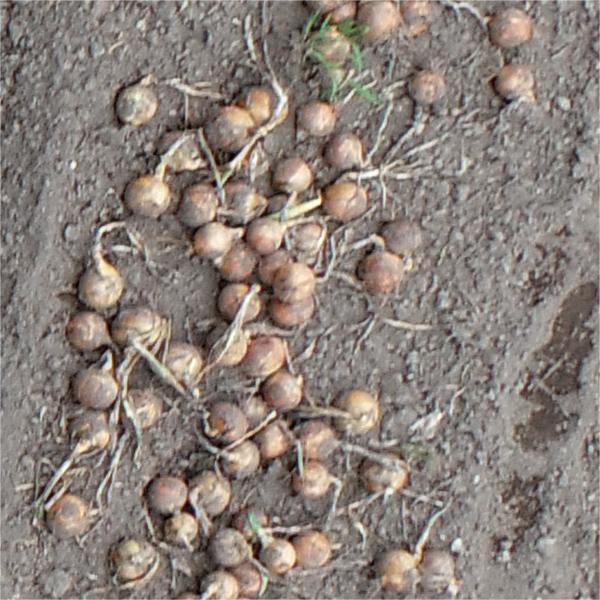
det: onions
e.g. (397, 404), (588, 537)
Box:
(383, 218), (420, 255)
(245, 217), (281, 254)
(200, 569), (237, 599)
(113, 83), (161, 127)
(221, 442), (259, 478)
(233, 507), (272, 546)
(253, 421), (291, 460)
(323, 178), (365, 219)
(241, 337), (284, 377)
(80, 262), (122, 308)
(74, 371), (115, 408)
(307, 28), (351, 81)
(125, 174), (172, 216)
(493, 62), (533, 100)
(258, 537), (295, 573)
(269, 285), (311, 326)
(273, 157), (310, 193)
(208, 327), (249, 365)
(372, 544), (420, 588)
(337, 388), (375, 429)
(144, 476), (186, 515)
(157, 131), (207, 180)
(208, 107), (252, 152)
(160, 511), (199, 548)
(360, 3), (399, 45)
(176, 183), (219, 226)
(113, 306), (165, 352)
(261, 370), (302, 409)
(211, 528), (249, 566)
(237, 398), (269, 425)
(265, 196), (304, 223)
(297, 100), (336, 137)
(192, 221), (234, 259)
(325, 131), (364, 171)
(358, 246), (403, 295)
(219, 247), (256, 280)
(287, 226), (329, 266)
(111, 536), (156, 581)
(289, 528), (329, 568)
(188, 471), (231, 519)
(202, 400), (247, 442)
(259, 252), (293, 285)
(161, 343), (203, 388)
(361, 456), (404, 493)
(48, 496), (90, 538)
(420, 552), (456, 593)
(241, 85), (276, 122)
(296, 424), (341, 459)
(126, 389), (159, 425)
(220, 183), (265, 222)
(292, 458), (329, 501)
(274, 265), (316, 304)
(406, 68), (442, 104)
(70, 411), (112, 453)
(305, 0), (355, 23)
(488, 6), (530, 47)
(230, 561), (264, 596)
(216, 282), (256, 319)
(66, 310), (110, 350)
(397, 0), (437, 32)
